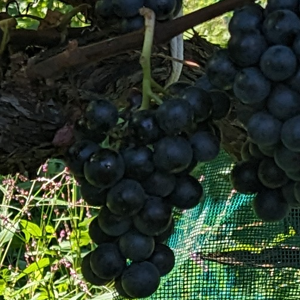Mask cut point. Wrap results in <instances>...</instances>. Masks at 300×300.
<instances>
[{
    "label": "cut point",
    "instance_id": "obj_1",
    "mask_svg": "<svg viewBox=\"0 0 300 300\" xmlns=\"http://www.w3.org/2000/svg\"><path fill=\"white\" fill-rule=\"evenodd\" d=\"M140 13L145 19V41L139 63L143 66V95L147 98L150 106V99L160 105L159 97L151 91V88L160 93L162 87L151 78V53L153 49V28L155 27V13L149 8H142Z\"/></svg>",
    "mask_w": 300,
    "mask_h": 300
}]
</instances>
